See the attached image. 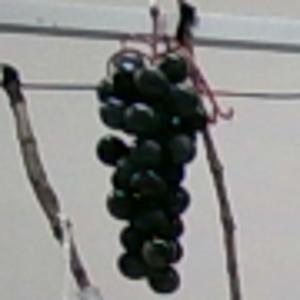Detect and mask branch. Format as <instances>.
<instances>
[{"mask_svg": "<svg viewBox=\"0 0 300 300\" xmlns=\"http://www.w3.org/2000/svg\"><path fill=\"white\" fill-rule=\"evenodd\" d=\"M176 5L179 17L174 35L175 53L178 56H187L194 63V29L201 23V19L197 15V7L187 0H176Z\"/></svg>", "mask_w": 300, "mask_h": 300, "instance_id": "branch-3", "label": "branch"}, {"mask_svg": "<svg viewBox=\"0 0 300 300\" xmlns=\"http://www.w3.org/2000/svg\"><path fill=\"white\" fill-rule=\"evenodd\" d=\"M190 82L192 87L198 89V91L200 92L195 71H194V76L190 79Z\"/></svg>", "mask_w": 300, "mask_h": 300, "instance_id": "branch-4", "label": "branch"}, {"mask_svg": "<svg viewBox=\"0 0 300 300\" xmlns=\"http://www.w3.org/2000/svg\"><path fill=\"white\" fill-rule=\"evenodd\" d=\"M203 141V150L206 154V162L209 168L213 188L216 191V199L219 204V221L222 228V247L226 260V280L228 285V300H242L243 284L237 261V224L231 210V202L225 185V173L223 163L218 157V145L210 130V123L202 131L198 132Z\"/></svg>", "mask_w": 300, "mask_h": 300, "instance_id": "branch-2", "label": "branch"}, {"mask_svg": "<svg viewBox=\"0 0 300 300\" xmlns=\"http://www.w3.org/2000/svg\"><path fill=\"white\" fill-rule=\"evenodd\" d=\"M0 88L5 95L11 118V135L27 181L35 200L43 212L49 229L62 250L65 262L79 290L82 300H104L101 288L90 280L84 263L78 254L72 221L67 218L55 193L48 172L38 152V138L33 132L27 111V98L22 87L21 73L10 62H0Z\"/></svg>", "mask_w": 300, "mask_h": 300, "instance_id": "branch-1", "label": "branch"}]
</instances>
